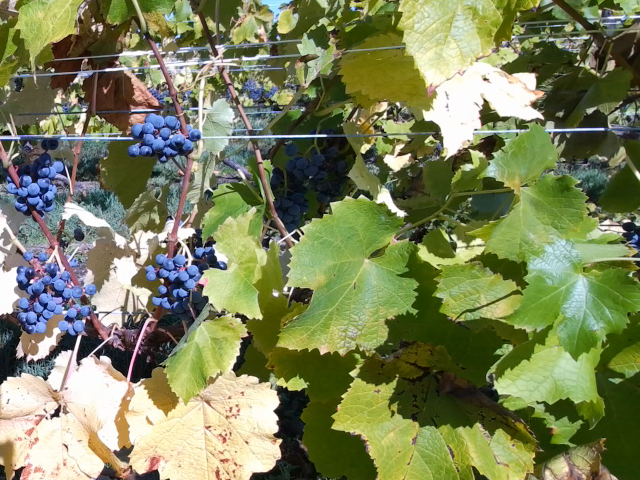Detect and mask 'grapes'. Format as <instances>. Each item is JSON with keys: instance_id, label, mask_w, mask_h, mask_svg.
Segmentation results:
<instances>
[{"instance_id": "84f90ec7", "label": "grapes", "mask_w": 640, "mask_h": 480, "mask_svg": "<svg viewBox=\"0 0 640 480\" xmlns=\"http://www.w3.org/2000/svg\"><path fill=\"white\" fill-rule=\"evenodd\" d=\"M64 169L61 160H52L49 153H41L32 165H21L18 168V176L21 180L19 187L15 185L11 177L7 174V192L10 195L18 196L15 202V209L22 212L24 216L30 217L32 214L28 210L33 206L41 219L45 218L43 212H52L54 197L57 195V185L51 183Z\"/></svg>"}, {"instance_id": "b958b902", "label": "grapes", "mask_w": 640, "mask_h": 480, "mask_svg": "<svg viewBox=\"0 0 640 480\" xmlns=\"http://www.w3.org/2000/svg\"><path fill=\"white\" fill-rule=\"evenodd\" d=\"M191 257L201 259L202 263L189 265L186 269H179L186 264L184 255L176 254L173 258H167L165 253L160 252L155 255V264L162 265V268L158 270L153 265L145 267L148 281L162 279L171 283L168 287L166 285L158 286V294L161 297L153 296L152 304L171 310L178 314L182 320H187L192 316V311L188 307L189 289H193L201 281L204 269L213 267L226 270L228 268L225 262L217 261V254L212 246L198 247L192 252Z\"/></svg>"}, {"instance_id": "f8a65327", "label": "grapes", "mask_w": 640, "mask_h": 480, "mask_svg": "<svg viewBox=\"0 0 640 480\" xmlns=\"http://www.w3.org/2000/svg\"><path fill=\"white\" fill-rule=\"evenodd\" d=\"M90 312H92L90 306L71 305L62 320L57 323V329L66 332L70 337L78 336L85 330V323L78 318L88 317Z\"/></svg>"}, {"instance_id": "01657485", "label": "grapes", "mask_w": 640, "mask_h": 480, "mask_svg": "<svg viewBox=\"0 0 640 480\" xmlns=\"http://www.w3.org/2000/svg\"><path fill=\"white\" fill-rule=\"evenodd\" d=\"M60 270L57 262H50L44 266L46 276L30 283L36 276V270L25 265H19L16 268L17 287L31 296V300L20 298L17 301V307L20 311L16 313V318L26 334L45 333L48 319L63 313V299L79 300L82 299L84 293L87 295L98 293V287L95 284H88L84 287L66 285L71 276L66 270L59 275Z\"/></svg>"}, {"instance_id": "5460f4e3", "label": "grapes", "mask_w": 640, "mask_h": 480, "mask_svg": "<svg viewBox=\"0 0 640 480\" xmlns=\"http://www.w3.org/2000/svg\"><path fill=\"white\" fill-rule=\"evenodd\" d=\"M208 302L209 298L207 296H202V293L200 291H195L192 294V302L190 303V306L193 309V314L196 317H199L202 310L207 306Z\"/></svg>"}, {"instance_id": "0513c4c2", "label": "grapes", "mask_w": 640, "mask_h": 480, "mask_svg": "<svg viewBox=\"0 0 640 480\" xmlns=\"http://www.w3.org/2000/svg\"><path fill=\"white\" fill-rule=\"evenodd\" d=\"M189 128L188 139L180 133H173L180 128V122L173 115L150 113L145 122H135L130 127L133 137L141 138L142 142L132 143L128 147V155L131 158L138 156H151L157 154L160 162H167L170 157L179 155L185 156L194 148V142L202 138V131L199 128Z\"/></svg>"}]
</instances>
